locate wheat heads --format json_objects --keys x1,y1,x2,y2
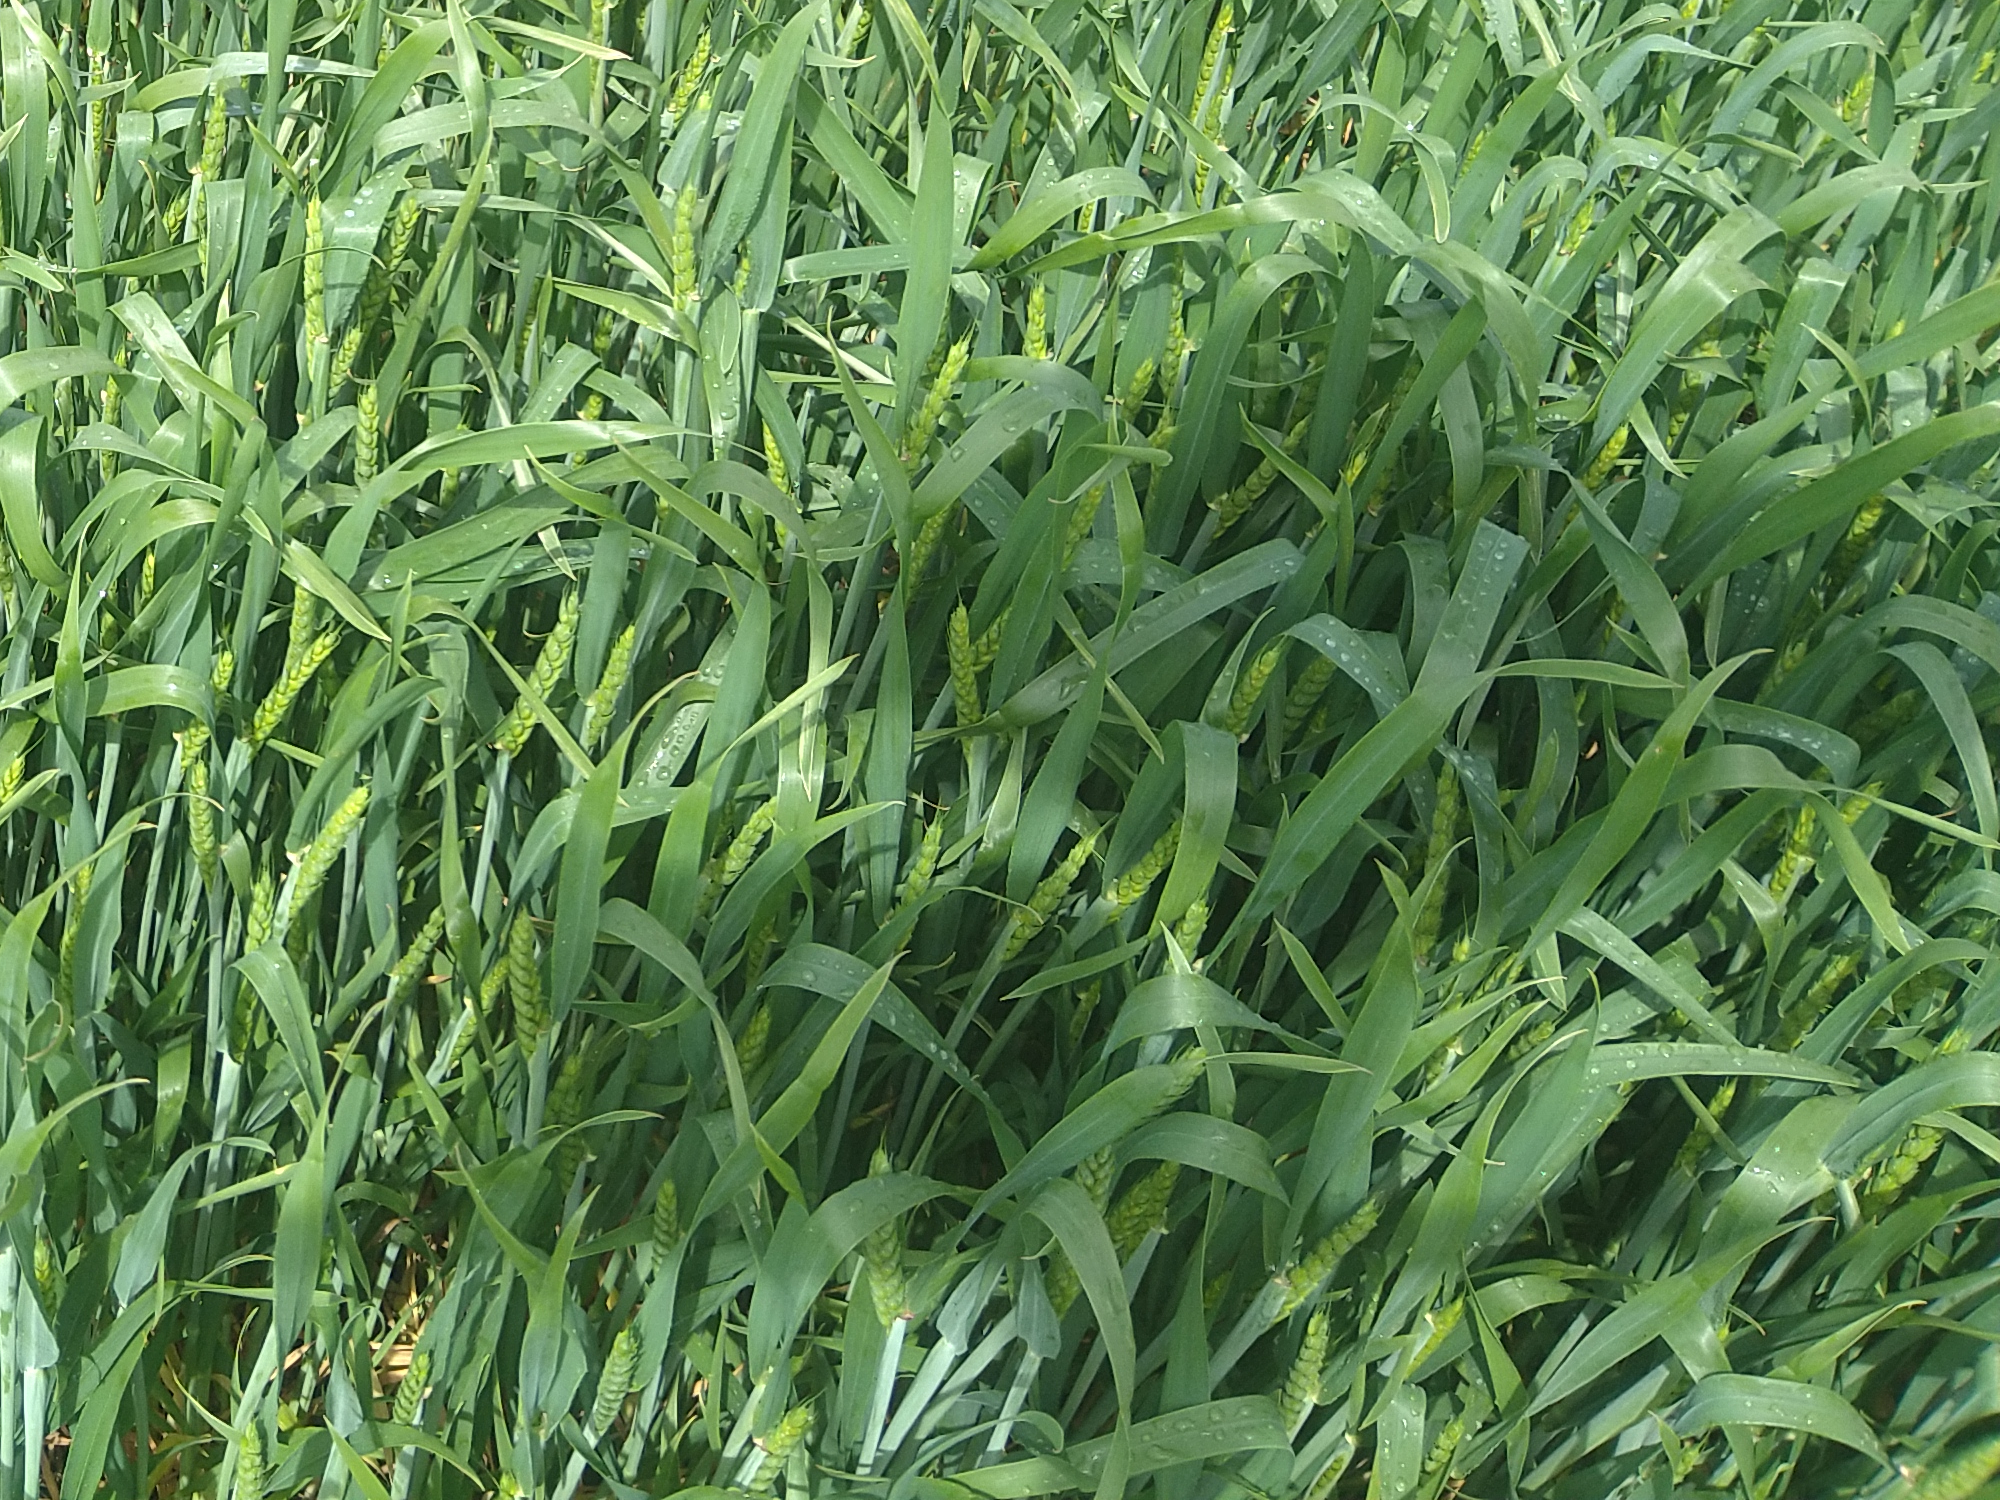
[
  {"x1": 658, "y1": 33, "x2": 711, "y2": 147},
  {"x1": 889, "y1": 822, "x2": 941, "y2": 946},
  {"x1": 589, "y1": 1328, "x2": 637, "y2": 1445},
  {"x1": 1460, "y1": 117, "x2": 1498, "y2": 184},
  {"x1": 222, "y1": 891, "x2": 239, "y2": 956},
  {"x1": 497, "y1": 587, "x2": 579, "y2": 750},
  {"x1": 198, "y1": 192, "x2": 212, "y2": 286},
  {"x1": 1504, "y1": 1024, "x2": 1558, "y2": 1065},
  {"x1": 1422, "y1": 994, "x2": 1464, "y2": 1092},
  {"x1": 763, "y1": 420, "x2": 797, "y2": 545},
  {"x1": 508, "y1": 908, "x2": 541, "y2": 1067},
  {"x1": 1157, "y1": 270, "x2": 1183, "y2": 398},
  {"x1": 1909, "y1": 1436, "x2": 2000, "y2": 1500},
  {"x1": 1815, "y1": 77, "x2": 1874, "y2": 152},
  {"x1": 100, "y1": 575, "x2": 118, "y2": 649},
  {"x1": 151, "y1": 185, "x2": 193, "y2": 250},
  {"x1": 1220, "y1": 649, "x2": 1276, "y2": 734},
  {"x1": 842, "y1": 0, "x2": 872, "y2": 60},
  {"x1": 324, "y1": 191, "x2": 423, "y2": 405},
  {"x1": 1601, "y1": 590, "x2": 1624, "y2": 648},
  {"x1": 1971, "y1": 48, "x2": 2000, "y2": 82},
  {"x1": 355, "y1": 386, "x2": 382, "y2": 492},
  {"x1": 188, "y1": 97, "x2": 225, "y2": 241},
  {"x1": 393, "y1": 1353, "x2": 432, "y2": 1427},
  {"x1": 283, "y1": 788, "x2": 369, "y2": 919},
  {"x1": 69, "y1": 857, "x2": 96, "y2": 906},
  {"x1": 754, "y1": 912, "x2": 777, "y2": 989},
  {"x1": 1336, "y1": 451, "x2": 1370, "y2": 495},
  {"x1": 1217, "y1": 417, "x2": 1315, "y2": 538},
  {"x1": 98, "y1": 352, "x2": 125, "y2": 485},
  {"x1": 0, "y1": 142, "x2": 7, "y2": 312},
  {"x1": 1119, "y1": 354, "x2": 1153, "y2": 423},
  {"x1": 948, "y1": 606, "x2": 986, "y2": 750},
  {"x1": 671, "y1": 185, "x2": 697, "y2": 300},
  {"x1": 1145, "y1": 424, "x2": 1175, "y2": 510},
  {"x1": 1828, "y1": 780, "x2": 1883, "y2": 847},
  {"x1": 64, "y1": 923, "x2": 79, "y2": 1020},
  {"x1": 634, "y1": 0, "x2": 652, "y2": 47},
  {"x1": 1106, "y1": 821, "x2": 1182, "y2": 920},
  {"x1": 497, "y1": 1475, "x2": 518, "y2": 1500},
  {"x1": 1673, "y1": 1082, "x2": 1735, "y2": 1186},
  {"x1": 36, "y1": 1237, "x2": 58, "y2": 1325},
  {"x1": 654, "y1": 1180, "x2": 677, "y2": 1285},
  {"x1": 1830, "y1": 486, "x2": 1893, "y2": 584},
  {"x1": 1163, "y1": 900, "x2": 1209, "y2": 974},
  {"x1": 1215, "y1": 161, "x2": 1240, "y2": 207},
  {"x1": 303, "y1": 197, "x2": 329, "y2": 380},
  {"x1": 748, "y1": 1406, "x2": 811, "y2": 1497},
  {"x1": 997, "y1": 838, "x2": 1095, "y2": 961},
  {"x1": 1807, "y1": 693, "x2": 1916, "y2": 786},
  {"x1": 139, "y1": 547, "x2": 158, "y2": 634},
  {"x1": 900, "y1": 501, "x2": 951, "y2": 606},
  {"x1": 1024, "y1": 274, "x2": 1048, "y2": 384},
  {"x1": 1107, "y1": 1161, "x2": 1181, "y2": 1265},
  {"x1": 89, "y1": 50, "x2": 110, "y2": 156},
  {"x1": 865, "y1": 1150, "x2": 903, "y2": 1322},
  {"x1": 1646, "y1": 1005, "x2": 1686, "y2": 1039},
  {"x1": 1438, "y1": 937, "x2": 1472, "y2": 997},
  {"x1": 1929, "y1": 1034, "x2": 1968, "y2": 1069},
  {"x1": 1592, "y1": 105, "x2": 1618, "y2": 180},
  {"x1": 556, "y1": 1086, "x2": 584, "y2": 1198},
  {"x1": 1868, "y1": 1108, "x2": 1955, "y2": 1217},
  {"x1": 1979, "y1": 345, "x2": 1998, "y2": 368},
  {"x1": 545, "y1": 1055, "x2": 579, "y2": 1131},
  {"x1": 572, "y1": 393, "x2": 608, "y2": 471},
  {"x1": 0, "y1": 754, "x2": 26, "y2": 838},
  {"x1": 1192, "y1": 2, "x2": 1233, "y2": 131},
  {"x1": 1418, "y1": 761, "x2": 1462, "y2": 950},
  {"x1": 1669, "y1": 1328, "x2": 1732, "y2": 1403},
  {"x1": 1065, "y1": 978, "x2": 1098, "y2": 1053},
  {"x1": 1671, "y1": 305, "x2": 1719, "y2": 457},
  {"x1": 1296, "y1": 359, "x2": 1326, "y2": 432},
  {"x1": 1124, "y1": 405, "x2": 1171, "y2": 474},
  {"x1": 1409, "y1": 1297, "x2": 1462, "y2": 1375},
  {"x1": 1039, "y1": 1146, "x2": 1117, "y2": 1312},
  {"x1": 285, "y1": 585, "x2": 317, "y2": 675},
  {"x1": 1565, "y1": 420, "x2": 1629, "y2": 534},
  {"x1": 969, "y1": 609, "x2": 1011, "y2": 671},
  {"x1": 232, "y1": 1421, "x2": 262, "y2": 1500},
  {"x1": 1755, "y1": 639, "x2": 1809, "y2": 714},
  {"x1": 1816, "y1": 1120, "x2": 1902, "y2": 1210},
  {"x1": 1195, "y1": 64, "x2": 1231, "y2": 207},
  {"x1": 1498, "y1": 999, "x2": 1524, "y2": 1027},
  {"x1": 1889, "y1": 315, "x2": 1907, "y2": 338},
  {"x1": 283, "y1": 913, "x2": 307, "y2": 969},
  {"x1": 1277, "y1": 1194, "x2": 1379, "y2": 1316},
  {"x1": 733, "y1": 238, "x2": 751, "y2": 305},
  {"x1": 1420, "y1": 1421, "x2": 1465, "y2": 1477},
  {"x1": 1752, "y1": 15, "x2": 1767, "y2": 40},
  {"x1": 1769, "y1": 803, "x2": 1815, "y2": 894},
  {"x1": 374, "y1": 21, "x2": 392, "y2": 72},
  {"x1": 1309, "y1": 1452, "x2": 1348, "y2": 1500},
  {"x1": 442, "y1": 466, "x2": 476, "y2": 505},
  {"x1": 1472, "y1": 952, "x2": 1525, "y2": 1021},
  {"x1": 1064, "y1": 477, "x2": 1107, "y2": 563},
  {"x1": 182, "y1": 655, "x2": 236, "y2": 767},
  {"x1": 724, "y1": 797, "x2": 778, "y2": 888},
  {"x1": 900, "y1": 337, "x2": 972, "y2": 478},
  {"x1": 1281, "y1": 652, "x2": 1334, "y2": 743},
  {"x1": 1563, "y1": 192, "x2": 1595, "y2": 261},
  {"x1": 511, "y1": 278, "x2": 538, "y2": 373},
  {"x1": 589, "y1": 626, "x2": 635, "y2": 754},
  {"x1": 1672, "y1": 1445, "x2": 1705, "y2": 1482},
  {"x1": 251, "y1": 634, "x2": 342, "y2": 746},
  {"x1": 447, "y1": 955, "x2": 515, "y2": 1070},
  {"x1": 1080, "y1": 198, "x2": 1094, "y2": 231},
  {"x1": 1138, "y1": 1047, "x2": 1212, "y2": 1124},
  {"x1": 590, "y1": 0, "x2": 609, "y2": 86},
  {"x1": 189, "y1": 760, "x2": 215, "y2": 887},
  {"x1": 1283, "y1": 1314, "x2": 1330, "y2": 1439},
  {"x1": 233, "y1": 874, "x2": 277, "y2": 1061},
  {"x1": 722, "y1": 1007, "x2": 770, "y2": 1101},
  {"x1": 597, "y1": 307, "x2": 611, "y2": 372},
  {"x1": 1312, "y1": 708, "x2": 1327, "y2": 734},
  {"x1": 391, "y1": 906, "x2": 446, "y2": 1002},
  {"x1": 1766, "y1": 948, "x2": 1859, "y2": 1052},
  {"x1": 1901, "y1": 0, "x2": 1937, "y2": 44},
  {"x1": 1680, "y1": 0, "x2": 1705, "y2": 37}
]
